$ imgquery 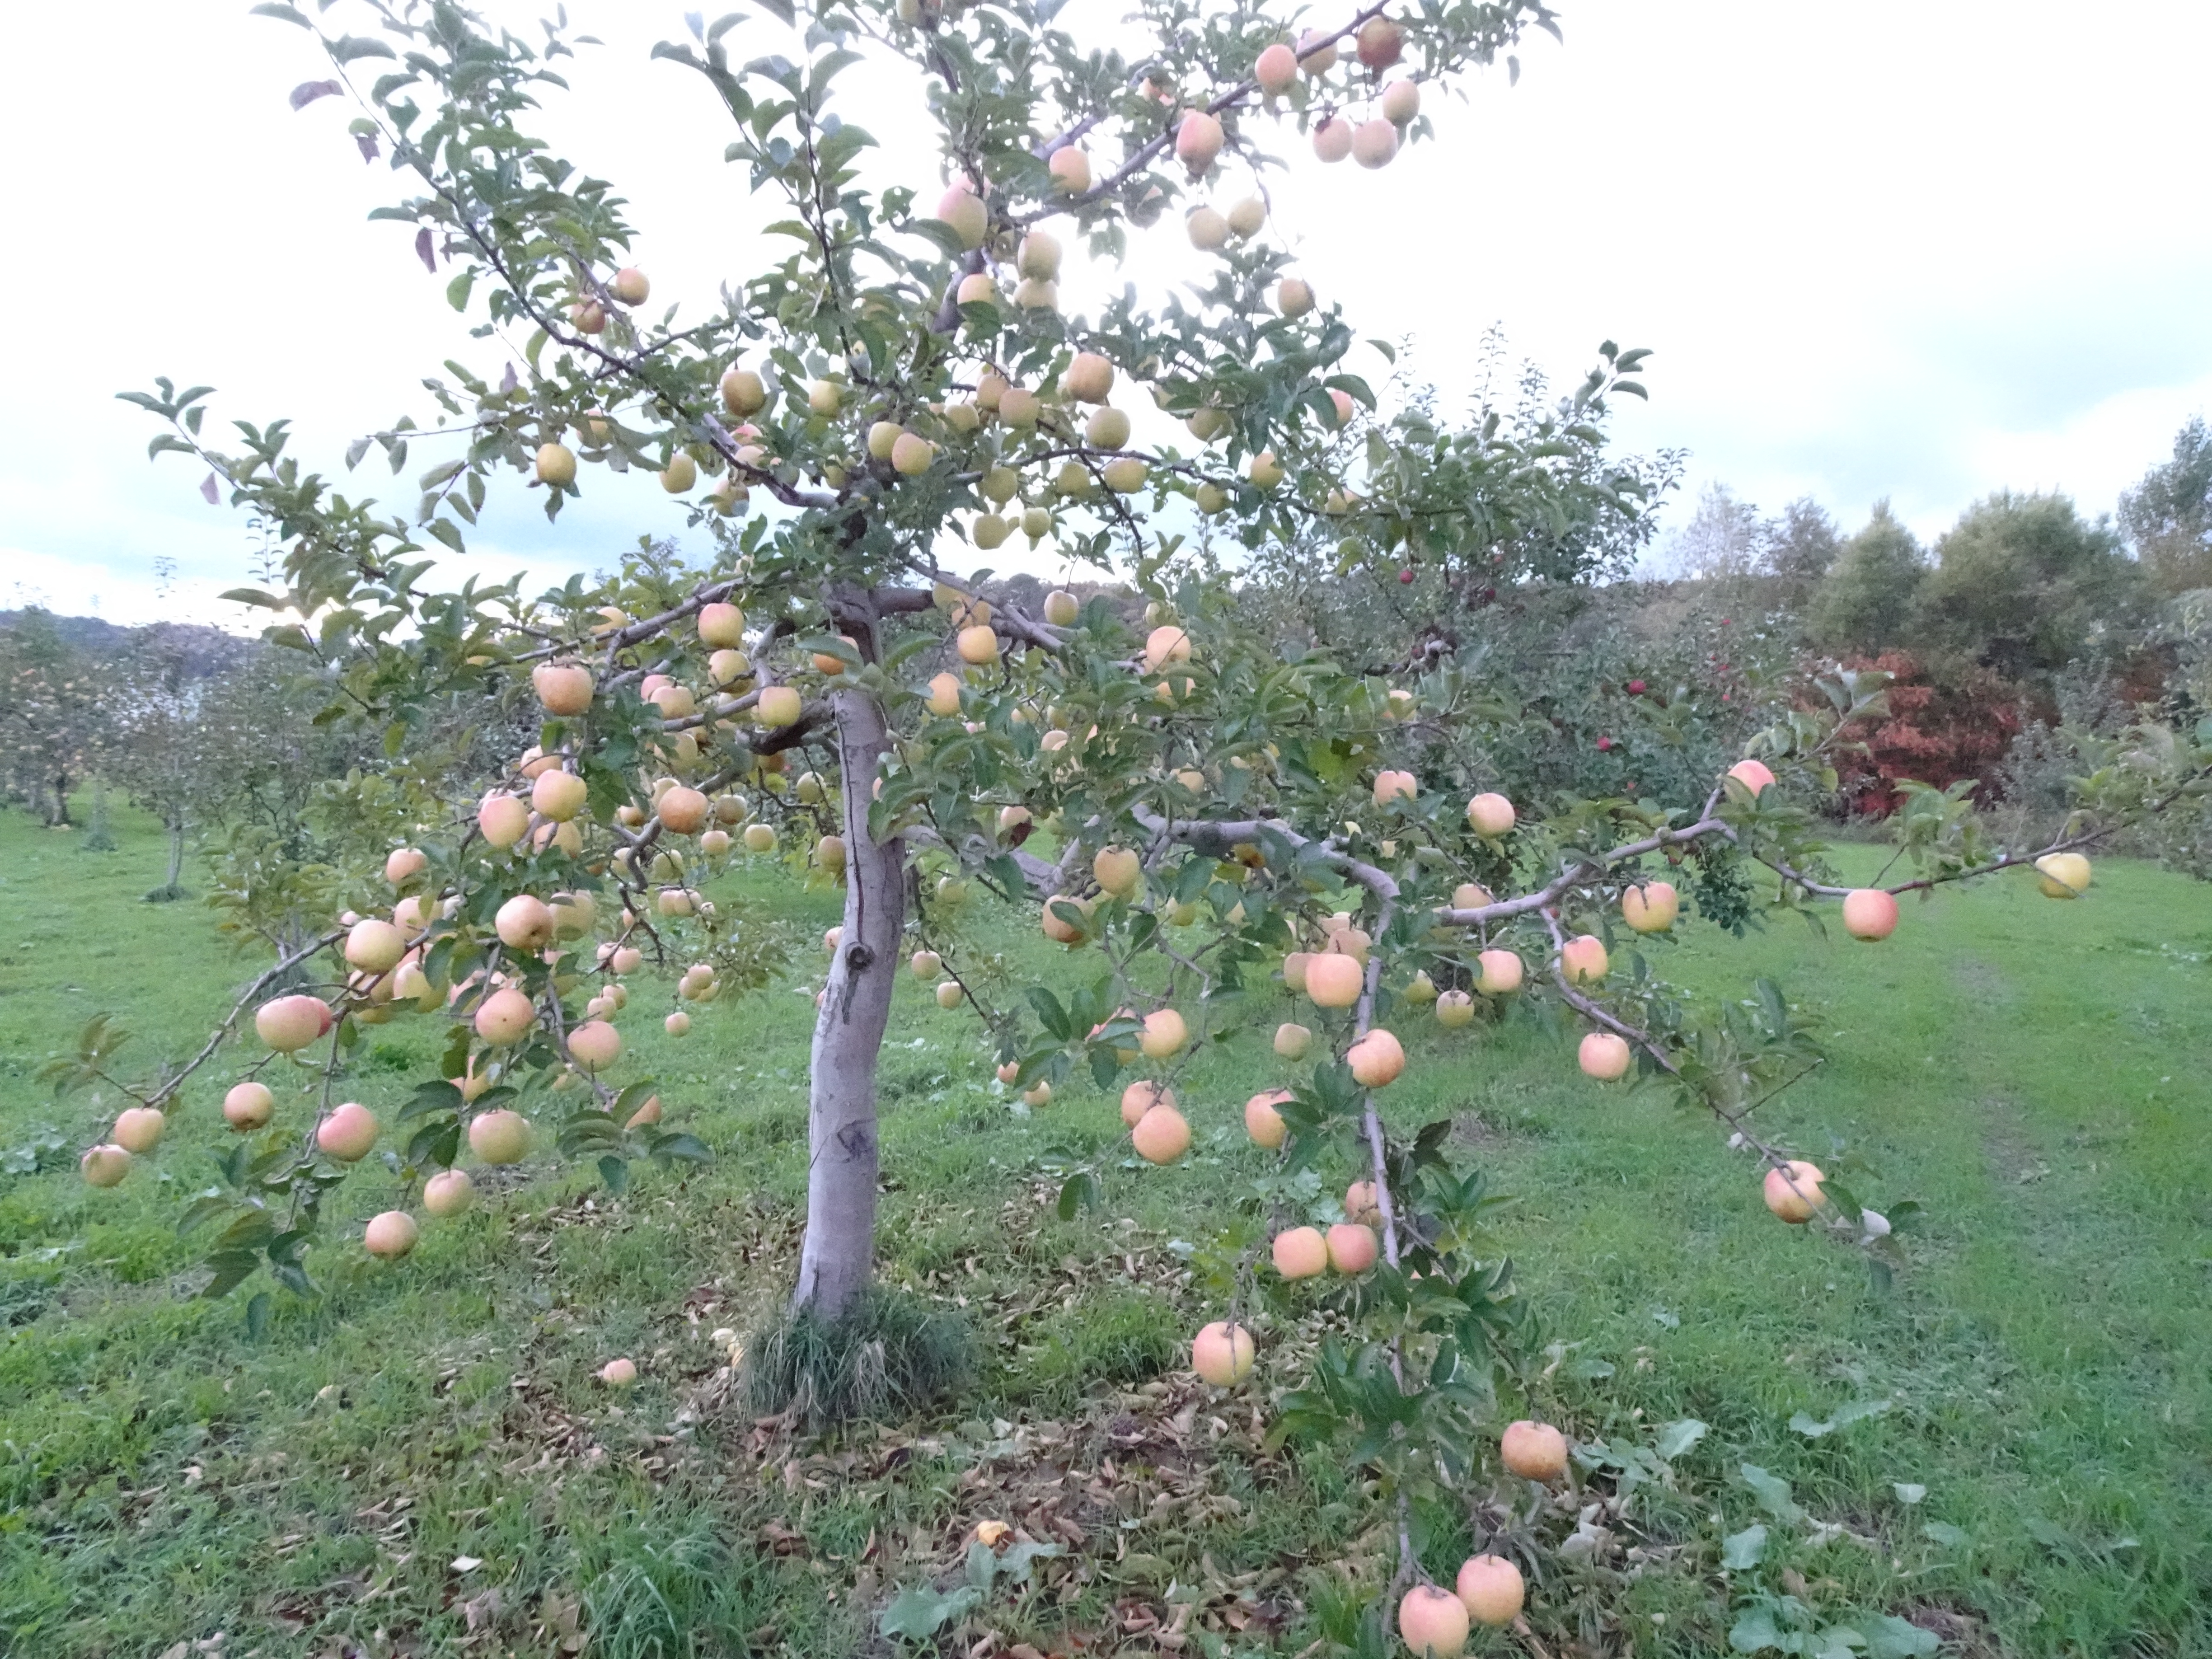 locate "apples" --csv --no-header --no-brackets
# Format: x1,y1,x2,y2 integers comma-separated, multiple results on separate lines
1274,1022,1311,1063
957,624,999,668
1276,276,1316,319
577,850,605,879
521,744,564,783
1056,461,1091,502
1381,78,1422,130
1192,1320,1256,1389
933,574,974,615
1041,894,1101,947
1046,144,1093,198
546,892,597,943
1262,919,1297,950
656,787,709,835
1225,194,1268,242
339,907,379,950
1214,754,1252,796
709,649,753,692
957,273,1004,329
643,729,679,768
448,1055,495,1103
1155,674,1198,714
609,1088,663,1131
1195,480,1233,516
1017,231,1065,283
586,995,618,1025
814,982,850,1011
1621,878,1680,936
1243,1086,1303,1150
1042,589,1081,630
1313,388,1357,433
1325,485,1361,522
1250,451,1287,492
1343,1179,1394,1231
1253,43,1298,98
113,1106,165,1155
1317,911,1366,951
588,605,628,651
1047,803,1078,837
796,770,828,805
364,1210,420,1262
1179,111,1227,168
314,1101,378,1163
475,988,538,1049
1003,704,1034,731
1328,821,1362,855
393,939,447,983
1203,857,1231,902
937,875,972,904
977,374,1013,413
423,1170,474,1218
728,423,768,456
1501,1418,1568,1485
701,695,740,715
1022,1079,1051,1108
1165,761,1205,803
950,600,990,636
652,848,683,882
653,730,699,777
1401,963,1437,1008
576,411,613,449
951,170,991,213
1012,281,1060,329
823,925,846,955
936,982,966,1012
890,433,934,476
649,775,685,803
434,919,479,962
1283,952,1319,994
695,717,738,748
1454,1552,1526,1631
1187,206,1229,254
957,710,991,739
1721,757,1780,810
1103,457,1147,495
1242,864,1278,897
812,633,857,676
614,846,647,880
1352,117,1402,173
1355,17,1406,71
483,784,526,812
534,442,577,488
647,685,697,730
348,967,396,1024
2032,849,2093,903
1184,406,1232,442
1323,1223,1379,1279
1578,1032,1632,1082
933,184,990,254
489,940,550,987
538,660,596,718
480,796,532,851
1294,29,1340,77
733,446,771,487
1434,989,1475,1030
944,405,982,440
1214,888,1259,935
1272,1225,1328,1283
1018,506,1051,538
636,673,681,709
392,961,449,1017
1312,116,1352,165
621,903,653,931
1145,600,1183,637
1560,851,1597,882
522,948,577,1001
1305,953,1366,1011
1145,627,1193,673
467,856,492,884
695,602,746,650
999,803,1033,839
81,1142,134,1189
464,637,500,672
699,831,731,857
1761,1159,1831,1226
391,894,448,947
1467,793,1515,841
741,822,777,854
1559,935,1612,987
1136,1009,1188,1059
672,888,703,919
656,891,682,918
818,834,853,874
1091,843,1141,897
599,982,628,1012
981,466,1018,504
999,387,1041,430
1043,731,1074,764
1046,693,1091,737
448,970,506,1017
545,1060,581,1091
826,454,858,490
1212,840,1257,884
614,948,644,976
757,740,787,775
920,670,969,719
496,893,556,953
1547,907,1565,921
1132,1103,1193,1170
343,919,406,977
572,296,607,334
720,371,768,420
872,773,905,806
1325,928,1372,973
717,683,763,723
972,513,1009,550
222,1081,277,1132
1370,788,1402,815
1841,887,1900,944
467,1109,534,1168
1397,1582,1471,1659
996,1058,1021,1086
619,793,654,828
1410,897,1455,946
713,795,748,826
255,995,334,1055
735,554,768,584
1165,894,1198,927
1376,690,1417,726
1453,885,1494,918
563,726,590,753
654,453,697,495
1069,718,1100,753
612,270,650,307
1374,770,1418,815
910,950,944,981
596,940,631,973
530,768,589,823
1067,352,1117,405
894,0,942,33
1119,1081,1174,1133
678,977,701,1000
568,1019,623,1074
416,817,442,843
1086,1006,1145,1063
664,1013,691,1039
439,894,478,927
687,964,715,991
868,421,908,466
532,816,584,868
892,738,929,768
1141,75,1178,115
1126,181,1165,228
757,685,803,729
385,847,431,891
711,478,752,519
1471,949,1525,999
1050,741,1090,777
1244,739,1282,773
1085,406,1132,450
1375,838,1404,868
1344,1028,1407,1091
